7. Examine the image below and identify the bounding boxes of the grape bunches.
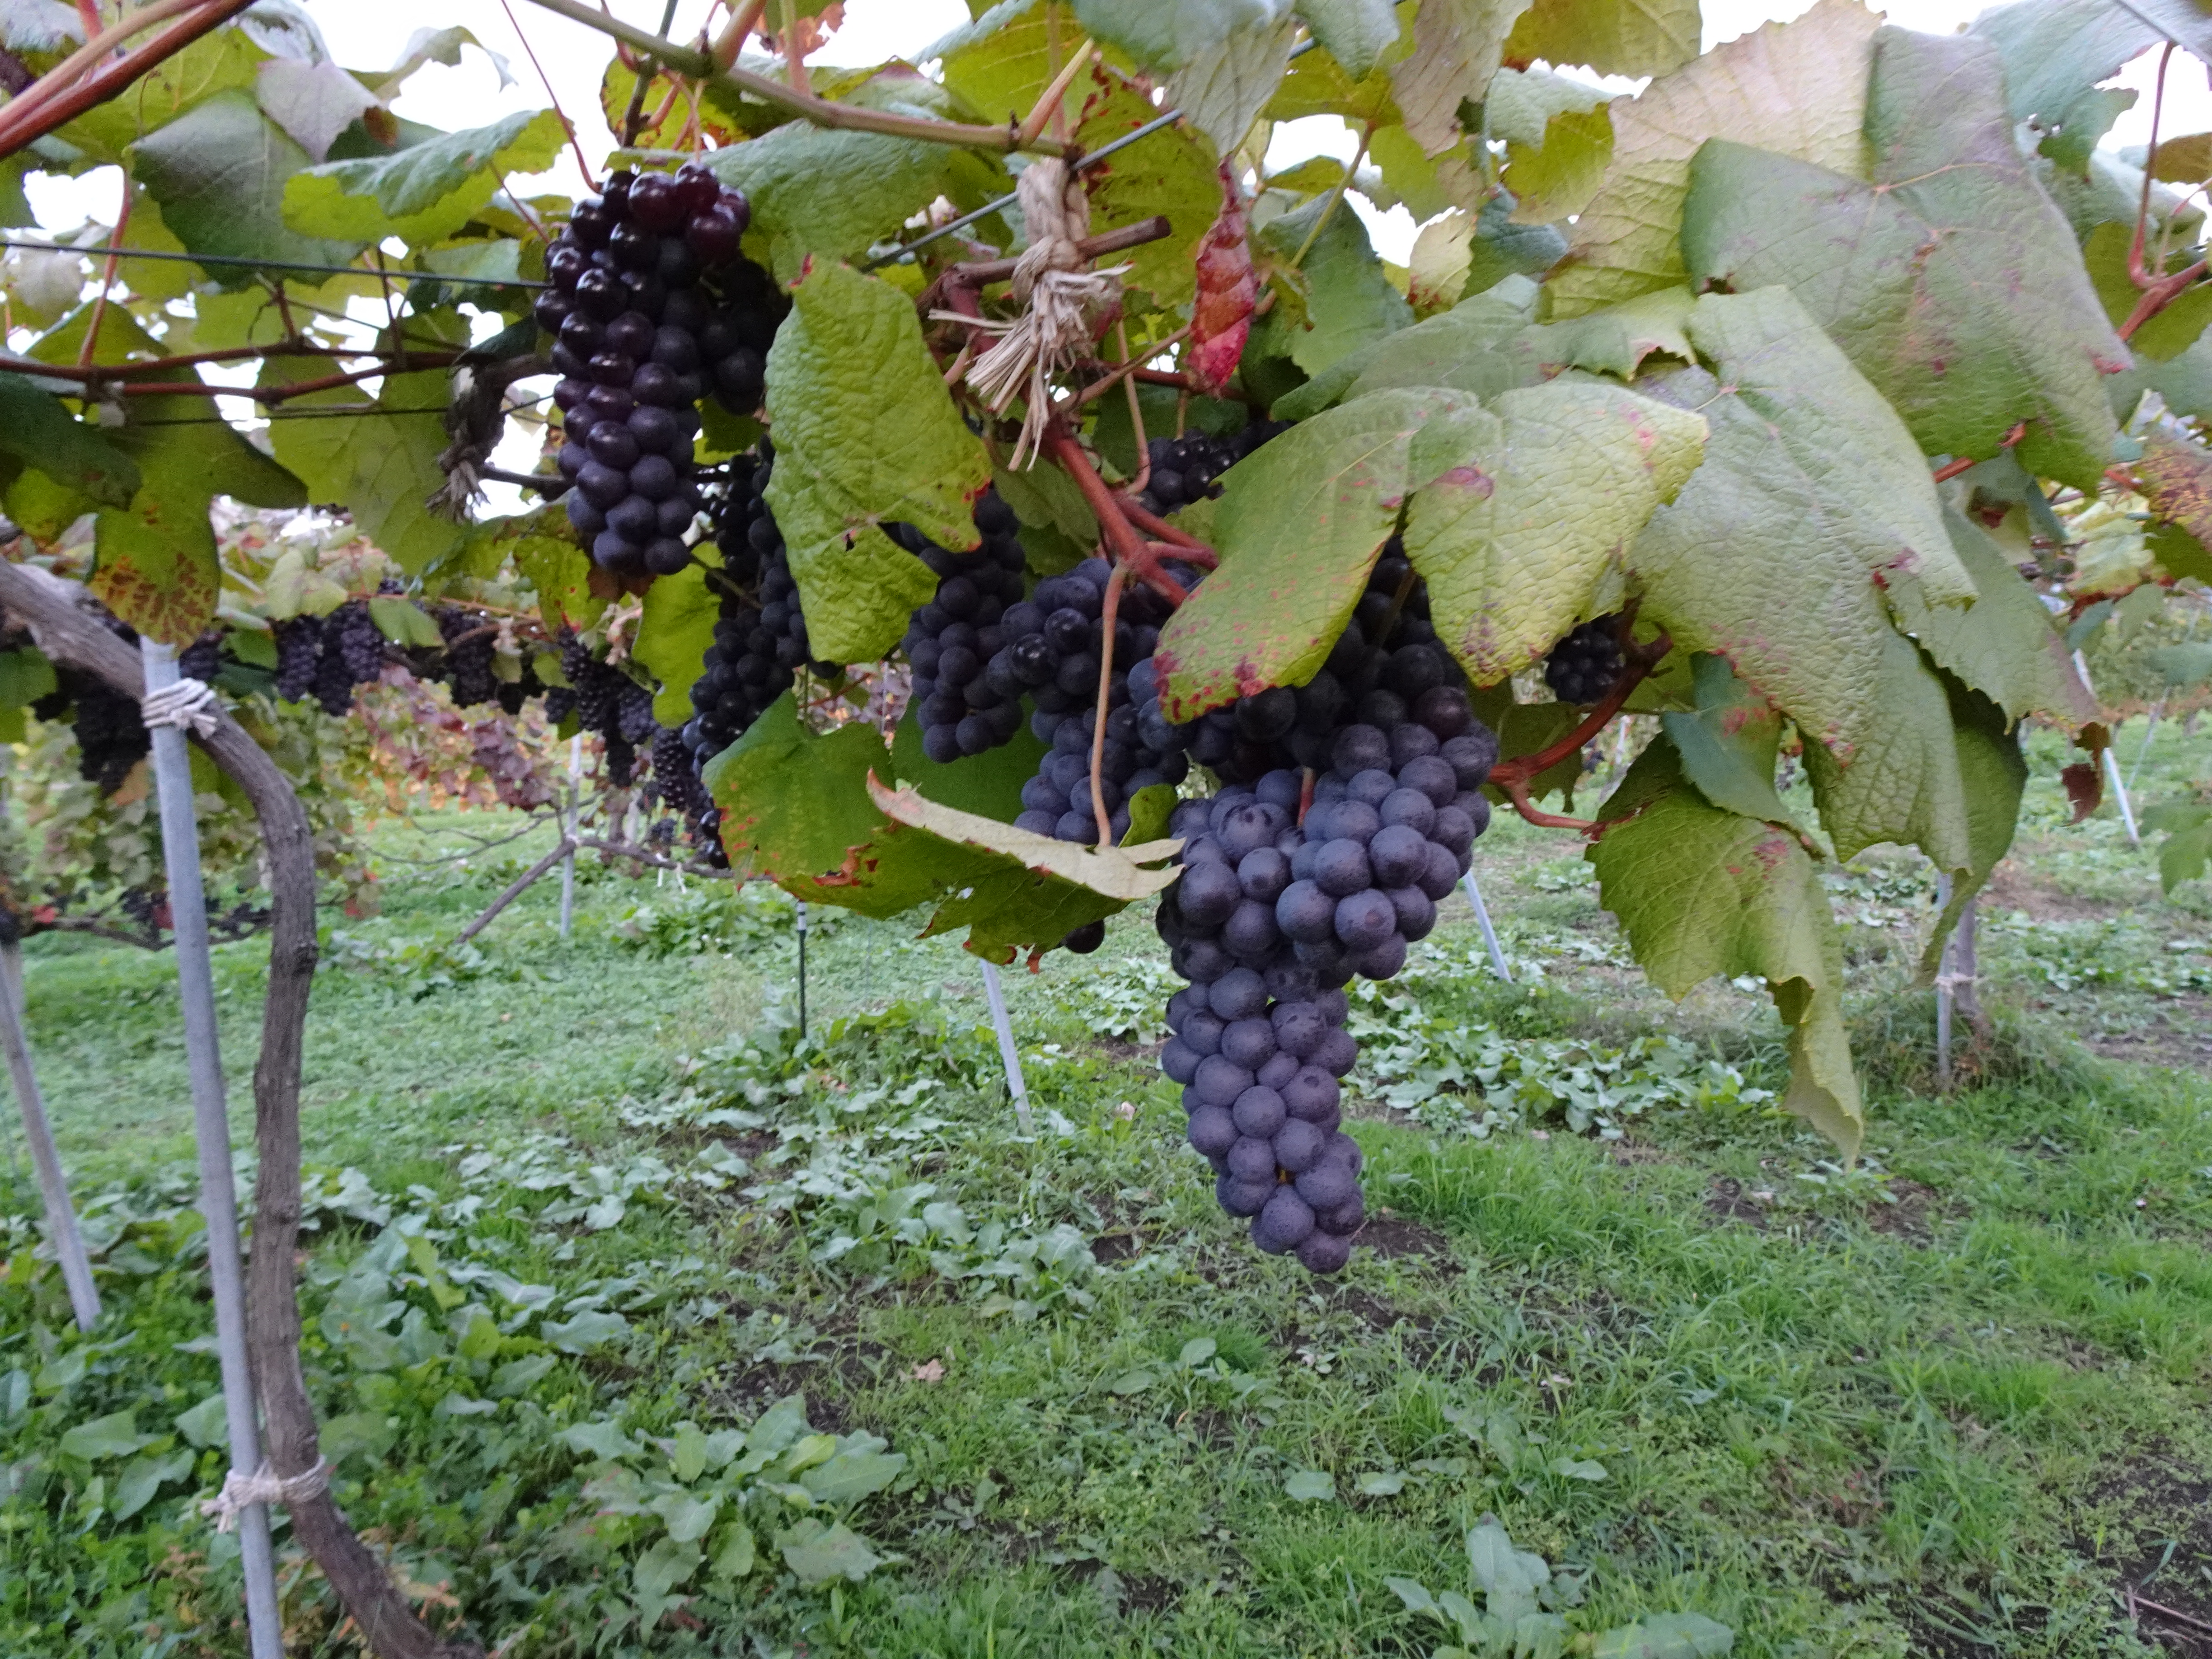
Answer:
[753,431,842,684]
[531,153,753,587]
[607,658,656,746]
[687,590,781,748]
[72,676,160,803]
[908,490,1026,766]
[997,551,1193,735]
[651,730,695,814]
[1128,592,1359,768]
[1127,427,1242,521]
[376,573,425,612]
[598,723,638,793]
[316,647,357,721]
[1272,653,1500,986]
[332,598,389,683]
[1006,703,1176,951]
[694,782,731,875]
[558,628,609,732]
[1546,626,1647,717]
[119,878,168,948]
[1352,546,1450,677]
[443,610,496,708]
[176,642,228,696]
[704,244,796,424]
[540,673,572,720]
[274,609,320,706]
[706,472,768,583]
[1134,766,1375,1274]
